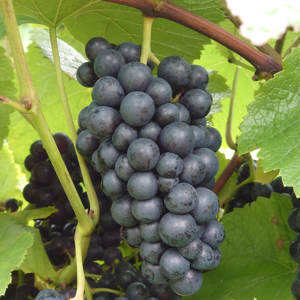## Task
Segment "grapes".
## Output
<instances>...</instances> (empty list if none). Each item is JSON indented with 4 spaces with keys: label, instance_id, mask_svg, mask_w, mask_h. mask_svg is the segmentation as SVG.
<instances>
[{
    "label": "grapes",
    "instance_id": "grapes-1",
    "mask_svg": "<svg viewBox=\"0 0 300 300\" xmlns=\"http://www.w3.org/2000/svg\"><path fill=\"white\" fill-rule=\"evenodd\" d=\"M85 55L76 79L92 88V102L79 113L76 150L100 173L122 241L139 248L143 277L193 295L202 273L220 264L225 238L212 191L222 136L205 118L209 74L168 56L155 77L137 44L103 37L91 38Z\"/></svg>",
    "mask_w": 300,
    "mask_h": 300
}]
</instances>
